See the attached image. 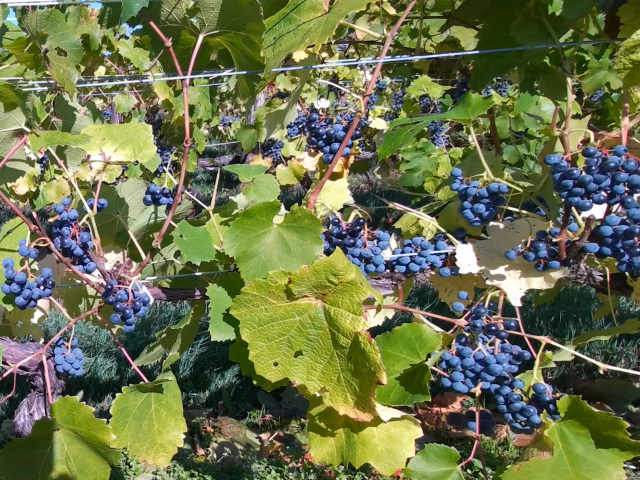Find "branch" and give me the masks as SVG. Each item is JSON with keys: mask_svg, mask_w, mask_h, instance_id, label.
<instances>
[{"mask_svg": "<svg viewBox=\"0 0 640 480\" xmlns=\"http://www.w3.org/2000/svg\"><path fill=\"white\" fill-rule=\"evenodd\" d=\"M48 151L49 153L55 158V160L57 161V163L60 165L61 169L63 170L64 174L66 175L67 180L69 181V184L72 188V190L74 191V193L76 194L77 198L79 199L80 203L82 204L84 210L87 213L88 218L90 219V225L93 228V232L96 238V243L98 246V251H99V264L100 265H104L105 261H104V249H103V243L101 240V235L97 226V222L95 221V217L92 214V211L90 209V207L88 206L87 202L85 201L84 196L82 195V193L79 191L78 187L76 186L73 177L71 176V173L69 172L67 166L65 165V163L62 161L61 157L56 153V151L53 149L52 146L48 147Z\"/></svg>", "mask_w": 640, "mask_h": 480, "instance_id": "obj_6", "label": "branch"}, {"mask_svg": "<svg viewBox=\"0 0 640 480\" xmlns=\"http://www.w3.org/2000/svg\"><path fill=\"white\" fill-rule=\"evenodd\" d=\"M389 308L397 309V310H400V311L414 312V313H416L418 315L428 316V317H431V318L439 320V321H446V322L452 323V324H454L456 326H464L465 325V322L462 319L456 320V319L448 317V316L438 315V314H435L433 312L426 311V310H421V309L416 308V307L402 306V305L393 304V303H386V304L382 305V309L383 310H386V309H389Z\"/></svg>", "mask_w": 640, "mask_h": 480, "instance_id": "obj_9", "label": "branch"}, {"mask_svg": "<svg viewBox=\"0 0 640 480\" xmlns=\"http://www.w3.org/2000/svg\"><path fill=\"white\" fill-rule=\"evenodd\" d=\"M572 211V207L569 204H566L564 206V211H563V224H562V228H561V237H560V242H559V257L566 259L567 255H566V244H565V240L567 237V227H568V221H569V217Z\"/></svg>", "mask_w": 640, "mask_h": 480, "instance_id": "obj_11", "label": "branch"}, {"mask_svg": "<svg viewBox=\"0 0 640 480\" xmlns=\"http://www.w3.org/2000/svg\"><path fill=\"white\" fill-rule=\"evenodd\" d=\"M538 9H539L540 18H541V20L543 22V25L546 28V30L552 36V38L554 39L555 42H560V39H559L558 35L555 33V31L552 29V27L548 23V20H547V18L545 16L544 7H543L542 3L538 4Z\"/></svg>", "mask_w": 640, "mask_h": 480, "instance_id": "obj_12", "label": "branch"}, {"mask_svg": "<svg viewBox=\"0 0 640 480\" xmlns=\"http://www.w3.org/2000/svg\"><path fill=\"white\" fill-rule=\"evenodd\" d=\"M107 305L106 301L101 302L98 306H96L95 308L91 309V310H87V311H83L81 314L77 315L69 324H67L66 326H63L62 328H60L49 340V342L42 347L41 351L38 352L37 354H34L33 356L29 357L28 359H26L25 361L19 363L18 365H16L15 367H13L11 370H7L5 372H3L0 375V381H3L7 376L13 374L14 372H17L18 370H20L22 367L28 365L29 363L33 362L35 359H37L39 356H42L43 353H45L47 351V349L49 347H52V345L54 344V342L65 332L70 330L71 328H73L81 319H83L85 316H89V315H93L95 313H97L98 311H100L101 309H103L105 306Z\"/></svg>", "mask_w": 640, "mask_h": 480, "instance_id": "obj_7", "label": "branch"}, {"mask_svg": "<svg viewBox=\"0 0 640 480\" xmlns=\"http://www.w3.org/2000/svg\"><path fill=\"white\" fill-rule=\"evenodd\" d=\"M415 4H416V0H411L409 5L407 6V8L401 13L399 18L392 25L391 30L389 32V35L387 36V41L385 42L384 48H383V50H382V52L380 54V59L386 57V54H387V52L389 50L390 44L392 43V39H393V37L395 35V32H396L397 28L403 22V20L405 19L406 15L411 12V10L414 8Z\"/></svg>", "mask_w": 640, "mask_h": 480, "instance_id": "obj_10", "label": "branch"}, {"mask_svg": "<svg viewBox=\"0 0 640 480\" xmlns=\"http://www.w3.org/2000/svg\"><path fill=\"white\" fill-rule=\"evenodd\" d=\"M508 335H514V336H521L523 338H528V339H533L536 341H542V342H546L549 343L550 345H553L555 348H558L564 352L573 354L579 358H581L582 360L586 361L587 363L598 367L600 369L603 370H609V371H613V372H619V373H625V374H632V375H636L638 377H640V371L638 370H634V369H628V368H621V367H615V366H611V365H605L602 364L598 361L593 360L592 358L586 356L584 353L579 352L575 349L569 348L567 346L562 345L561 343H558L556 340H553L552 338H548L545 336H538L535 334H530V333H525L523 331H517V330H508L507 331Z\"/></svg>", "mask_w": 640, "mask_h": 480, "instance_id": "obj_4", "label": "branch"}, {"mask_svg": "<svg viewBox=\"0 0 640 480\" xmlns=\"http://www.w3.org/2000/svg\"><path fill=\"white\" fill-rule=\"evenodd\" d=\"M0 198L3 200V202L8 205L10 208H12L13 212L16 214L17 217H19L21 219V221L23 223H25L30 229H31V233L32 234H36V236L43 242V244L45 245V247L47 248V250L52 253L53 255H55L57 258H60L61 261L64 263V265L66 267H68L71 271H73L76 276L81 279L82 281H86L87 284L91 287H93L97 293L99 294H103L104 290L101 289L95 282L91 281L90 279H88L86 276H84L79 269L72 265L68 259L60 252H58V250L56 249V247L51 243L50 240H47L44 235L41 233L40 228L37 225H34L31 221H29L17 208V206L10 201L3 193L2 190H0Z\"/></svg>", "mask_w": 640, "mask_h": 480, "instance_id": "obj_3", "label": "branch"}, {"mask_svg": "<svg viewBox=\"0 0 640 480\" xmlns=\"http://www.w3.org/2000/svg\"><path fill=\"white\" fill-rule=\"evenodd\" d=\"M139 15L141 16V18L144 20L145 24L154 32L156 33L164 46V49L166 50V52L168 53L173 65H174V69L176 70V74L181 77L184 75V71L183 68L181 67V63L179 61V58L176 54V52L174 51V49L172 48L170 41L167 37V35L164 33V31L158 27L152 20L151 18L148 16L147 12L145 10H141L139 12Z\"/></svg>", "mask_w": 640, "mask_h": 480, "instance_id": "obj_8", "label": "branch"}, {"mask_svg": "<svg viewBox=\"0 0 640 480\" xmlns=\"http://www.w3.org/2000/svg\"><path fill=\"white\" fill-rule=\"evenodd\" d=\"M381 69H382V64H379V65L376 66L375 71L373 72L372 78L370 80V83H369V85H368V87L366 89L365 95H364V97H363V99L361 101V104L358 107L357 115H356L354 121L352 122V125L349 128V132H348L346 138L344 139V141L340 145V147L337 149V153H336L335 158L332 160L331 165L327 168L326 173H324L322 175L320 182L315 187L314 191L311 194L310 199L308 200L307 208L309 210H312L314 208L315 203H316V201L318 199V196L320 195L322 189L326 186V181L331 177V175H332V173L334 171V168L336 167V164L341 159L342 152L344 151V149L347 147V145L349 144L350 140L352 139L354 131H355L357 125L359 124V122H360V120L362 118L363 110H364V108L366 106V103L369 100V97L371 95V92H372V90L374 88V85L376 83L377 77H378Z\"/></svg>", "mask_w": 640, "mask_h": 480, "instance_id": "obj_2", "label": "branch"}, {"mask_svg": "<svg viewBox=\"0 0 640 480\" xmlns=\"http://www.w3.org/2000/svg\"><path fill=\"white\" fill-rule=\"evenodd\" d=\"M558 51L563 60L565 66V79L567 89V112H566V125L560 130L559 138L560 143L564 147V154H570V131H571V114H572V95H573V63L568 61L563 47H558Z\"/></svg>", "mask_w": 640, "mask_h": 480, "instance_id": "obj_5", "label": "branch"}, {"mask_svg": "<svg viewBox=\"0 0 640 480\" xmlns=\"http://www.w3.org/2000/svg\"><path fill=\"white\" fill-rule=\"evenodd\" d=\"M181 83V90H182V109H183V129H184V136H185V142H184V147H183V159H182V163H181V167H180V175H179V184H178V190L176 193V197H175V201L173 203V205L171 206L170 211H168L165 215V218L163 219L162 223H161V227L159 229V232L157 234V236L155 237V241L154 243L150 246L149 251L143 261V263L137 267L136 269L132 270L130 272V276L134 277L136 274L140 273L141 271H143L149 261L151 260L153 253L155 251V249L157 248V246L163 241L164 236L166 235V231L168 229V226L172 220V217L174 216V213L176 212L177 207L180 204V200H181V196L183 193V187H184V178H185V169H186V165H187V161L189 158V153H190V149H191V144H192V133H191V127H190V107H189V88H188V81H183L180 82Z\"/></svg>", "mask_w": 640, "mask_h": 480, "instance_id": "obj_1", "label": "branch"}]
</instances>
